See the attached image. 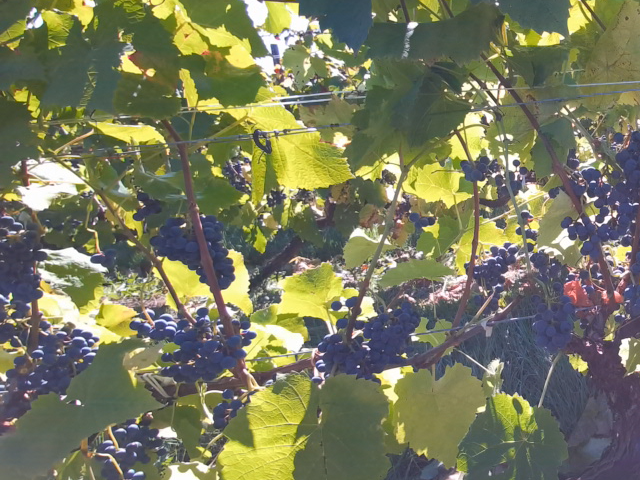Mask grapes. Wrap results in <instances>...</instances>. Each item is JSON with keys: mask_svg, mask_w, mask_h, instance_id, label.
Here are the masks:
<instances>
[{"mask_svg": "<svg viewBox=\"0 0 640 480\" xmlns=\"http://www.w3.org/2000/svg\"><path fill=\"white\" fill-rule=\"evenodd\" d=\"M629 143V147L615 156V160L624 171L623 183H617L612 187L609 183L598 186L602 172L593 167L579 170V174L589 184L587 189L584 184L577 185L573 178L569 179V184L576 196H581L586 191L589 198H598L593 201L595 208H601L600 214L595 216L597 224H602L604 216L610 214V209L603 207L604 205L609 204L611 209H617V214L621 216L616 230L609 229L607 224L596 227L591 223L589 216L582 218V223L572 224L571 216H566L561 222V227L566 229L571 240H590L581 244L580 253L588 255L592 261L600 260V242L618 240L620 235H625L620 239V244L623 247H629L633 242V236L626 233L637 231V226L632 220L639 217L640 205H631L629 202H640V132L632 131Z\"/></svg>", "mask_w": 640, "mask_h": 480, "instance_id": "obj_1", "label": "grapes"}, {"mask_svg": "<svg viewBox=\"0 0 640 480\" xmlns=\"http://www.w3.org/2000/svg\"><path fill=\"white\" fill-rule=\"evenodd\" d=\"M393 315L398 320L385 329L384 324L389 321L387 314H381L366 323L357 320L354 328L363 330V336L353 338V350L340 344L343 342L342 336L326 333L317 343L319 352L325 354L323 358L315 360V368L319 373H324L325 379L331 376L335 368L337 374L356 375L358 378L364 376L366 380L381 384L382 380L374 373L381 374L387 363L401 362V358L396 355L401 349L400 343L415 332L421 322V318L411 311V305L407 302H402ZM324 378L312 376L311 381L320 385Z\"/></svg>", "mask_w": 640, "mask_h": 480, "instance_id": "obj_2", "label": "grapes"}, {"mask_svg": "<svg viewBox=\"0 0 640 480\" xmlns=\"http://www.w3.org/2000/svg\"><path fill=\"white\" fill-rule=\"evenodd\" d=\"M51 323L41 320L38 323L37 349H33L31 356L34 359L43 357L27 373L18 372L16 368L6 371L8 378L17 381V390L8 398L5 408L7 417H18L32 409V402L39 395H47L58 392L65 395L70 388V373L73 364L78 372H84L95 359V353L91 351L93 345L101 341L99 335H93L89 330L82 328L62 327L55 335L49 330Z\"/></svg>", "mask_w": 640, "mask_h": 480, "instance_id": "obj_3", "label": "grapes"}, {"mask_svg": "<svg viewBox=\"0 0 640 480\" xmlns=\"http://www.w3.org/2000/svg\"><path fill=\"white\" fill-rule=\"evenodd\" d=\"M233 325L243 329L244 337L232 335L227 339L230 354L222 348L223 344L220 341H201L199 343L197 329H187L189 327L187 320L176 321L169 314H162L153 322V327L146 321H132L130 329L153 340L166 339L168 342H174L177 346H181V349H176L173 354L163 353L161 360L163 362L196 360L195 365L183 364L181 368L178 365L165 366L160 370V375L174 378L176 382L185 380L188 383H194L200 378L212 382L224 369H233L239 359H244L247 356V350L241 347L250 346L251 339H256L257 333L247 331L250 327L249 321L233 320Z\"/></svg>", "mask_w": 640, "mask_h": 480, "instance_id": "obj_4", "label": "grapes"}, {"mask_svg": "<svg viewBox=\"0 0 640 480\" xmlns=\"http://www.w3.org/2000/svg\"><path fill=\"white\" fill-rule=\"evenodd\" d=\"M24 229L8 215L0 216V322L8 318L5 305L16 307L12 318H23L31 310L34 300L43 297L40 287V274L35 272L33 262L45 261L48 254L41 242H35L37 226L28 224L21 243L9 244L6 239L12 231Z\"/></svg>", "mask_w": 640, "mask_h": 480, "instance_id": "obj_5", "label": "grapes"}, {"mask_svg": "<svg viewBox=\"0 0 640 480\" xmlns=\"http://www.w3.org/2000/svg\"><path fill=\"white\" fill-rule=\"evenodd\" d=\"M151 425L150 419H145L138 424L135 419H129L125 423L114 425L111 432L116 437L121 450L117 451L116 445L111 440H106L97 447L99 454H111L115 458L126 480H144L146 478L144 471L127 467L135 466L137 461L148 464L150 457L144 449L153 450L162 445V441L157 438L159 431L149 429Z\"/></svg>", "mask_w": 640, "mask_h": 480, "instance_id": "obj_6", "label": "grapes"}, {"mask_svg": "<svg viewBox=\"0 0 640 480\" xmlns=\"http://www.w3.org/2000/svg\"><path fill=\"white\" fill-rule=\"evenodd\" d=\"M532 302L538 309L536 321L533 324V330L540 335L538 344L541 347H547L552 353H556L559 349H564L566 344L572 342L573 323L570 316L574 310L572 300L566 294L559 297L560 306L548 309L543 304V297L535 294Z\"/></svg>", "mask_w": 640, "mask_h": 480, "instance_id": "obj_7", "label": "grapes"}, {"mask_svg": "<svg viewBox=\"0 0 640 480\" xmlns=\"http://www.w3.org/2000/svg\"><path fill=\"white\" fill-rule=\"evenodd\" d=\"M184 223L182 218L169 217L166 225L160 228V236L150 239L152 246H158V255L168 257L170 261H179L188 264L190 271H196V275H201L200 283H207L204 270L200 266L199 243L195 236L182 230L180 226Z\"/></svg>", "mask_w": 640, "mask_h": 480, "instance_id": "obj_8", "label": "grapes"}, {"mask_svg": "<svg viewBox=\"0 0 640 480\" xmlns=\"http://www.w3.org/2000/svg\"><path fill=\"white\" fill-rule=\"evenodd\" d=\"M489 253L494 257H486L482 264L473 268V279L478 284H484L487 291H493L492 300L484 307L483 313L489 315L498 309L500 292L504 290L505 276L501 273L508 271V265L516 262L517 247L506 242L504 248L497 245L489 247Z\"/></svg>", "mask_w": 640, "mask_h": 480, "instance_id": "obj_9", "label": "grapes"}, {"mask_svg": "<svg viewBox=\"0 0 640 480\" xmlns=\"http://www.w3.org/2000/svg\"><path fill=\"white\" fill-rule=\"evenodd\" d=\"M204 237L207 242V249L213 259V267L216 271V278L222 290H227L231 285V282L235 280V266L233 265V259L226 257L228 255V249L222 247L218 242L222 240L223 224L220 221H216L214 215H200Z\"/></svg>", "mask_w": 640, "mask_h": 480, "instance_id": "obj_10", "label": "grapes"}, {"mask_svg": "<svg viewBox=\"0 0 640 480\" xmlns=\"http://www.w3.org/2000/svg\"><path fill=\"white\" fill-rule=\"evenodd\" d=\"M9 338V345L11 347H24L29 342L30 331L23 325L0 323V344H4Z\"/></svg>", "mask_w": 640, "mask_h": 480, "instance_id": "obj_11", "label": "grapes"}, {"mask_svg": "<svg viewBox=\"0 0 640 480\" xmlns=\"http://www.w3.org/2000/svg\"><path fill=\"white\" fill-rule=\"evenodd\" d=\"M490 164L491 158L483 155L479 160H463L460 168L465 172V180L474 184L484 179Z\"/></svg>", "mask_w": 640, "mask_h": 480, "instance_id": "obj_12", "label": "grapes"}, {"mask_svg": "<svg viewBox=\"0 0 640 480\" xmlns=\"http://www.w3.org/2000/svg\"><path fill=\"white\" fill-rule=\"evenodd\" d=\"M533 267L539 270L544 277L556 278L563 264L556 259L550 260L549 256L541 250H536L530 256Z\"/></svg>", "mask_w": 640, "mask_h": 480, "instance_id": "obj_13", "label": "grapes"}, {"mask_svg": "<svg viewBox=\"0 0 640 480\" xmlns=\"http://www.w3.org/2000/svg\"><path fill=\"white\" fill-rule=\"evenodd\" d=\"M249 403H250L249 399H244L243 401L241 399H234L231 401V403H217L213 407L212 419H213L214 427L216 429L225 428L227 426V423L225 422V419H224L226 417V411L231 410L230 416L236 417L237 416L236 410L241 409L242 407H245L246 404H249Z\"/></svg>", "mask_w": 640, "mask_h": 480, "instance_id": "obj_14", "label": "grapes"}, {"mask_svg": "<svg viewBox=\"0 0 640 480\" xmlns=\"http://www.w3.org/2000/svg\"><path fill=\"white\" fill-rule=\"evenodd\" d=\"M622 295L628 301L625 309L633 318L640 316V286L636 284H628Z\"/></svg>", "mask_w": 640, "mask_h": 480, "instance_id": "obj_15", "label": "grapes"}, {"mask_svg": "<svg viewBox=\"0 0 640 480\" xmlns=\"http://www.w3.org/2000/svg\"><path fill=\"white\" fill-rule=\"evenodd\" d=\"M137 200L142 202L145 207L138 209L136 213L133 215L134 221H141L145 217L150 216L152 214H160L162 212V206L159 200H150L149 195L146 193H138Z\"/></svg>", "mask_w": 640, "mask_h": 480, "instance_id": "obj_16", "label": "grapes"}, {"mask_svg": "<svg viewBox=\"0 0 640 480\" xmlns=\"http://www.w3.org/2000/svg\"><path fill=\"white\" fill-rule=\"evenodd\" d=\"M600 270L598 263H594L590 271L587 268H582L578 273V278L581 280V288L587 293L591 294L596 291V288L593 285H587L588 280L591 276L594 280H600L603 277V273Z\"/></svg>", "mask_w": 640, "mask_h": 480, "instance_id": "obj_17", "label": "grapes"}, {"mask_svg": "<svg viewBox=\"0 0 640 480\" xmlns=\"http://www.w3.org/2000/svg\"><path fill=\"white\" fill-rule=\"evenodd\" d=\"M115 253V247H105L102 253L95 254L90 258V263L93 265H101L105 268H112L115 262V258L113 257Z\"/></svg>", "mask_w": 640, "mask_h": 480, "instance_id": "obj_18", "label": "grapes"}, {"mask_svg": "<svg viewBox=\"0 0 640 480\" xmlns=\"http://www.w3.org/2000/svg\"><path fill=\"white\" fill-rule=\"evenodd\" d=\"M208 312V308H199L197 310V323L195 324V327L199 328L202 333H210L212 331V328L206 324L209 322V318L207 317Z\"/></svg>", "mask_w": 640, "mask_h": 480, "instance_id": "obj_19", "label": "grapes"}, {"mask_svg": "<svg viewBox=\"0 0 640 480\" xmlns=\"http://www.w3.org/2000/svg\"><path fill=\"white\" fill-rule=\"evenodd\" d=\"M410 221L412 223H415L418 227H421V228H427L428 226H433L437 223V219L434 216H431V217L423 216L421 218V216L418 213H413L410 216Z\"/></svg>", "mask_w": 640, "mask_h": 480, "instance_id": "obj_20", "label": "grapes"}, {"mask_svg": "<svg viewBox=\"0 0 640 480\" xmlns=\"http://www.w3.org/2000/svg\"><path fill=\"white\" fill-rule=\"evenodd\" d=\"M508 174L510 175V181L513 189L512 195L517 196L523 187V182L521 180H516V174L513 171H510Z\"/></svg>", "mask_w": 640, "mask_h": 480, "instance_id": "obj_21", "label": "grapes"}, {"mask_svg": "<svg viewBox=\"0 0 640 480\" xmlns=\"http://www.w3.org/2000/svg\"><path fill=\"white\" fill-rule=\"evenodd\" d=\"M503 177L500 174H497L494 178L495 185L499 188L500 193L505 196L507 199H510V196L507 192L506 185H503Z\"/></svg>", "mask_w": 640, "mask_h": 480, "instance_id": "obj_22", "label": "grapes"}]
</instances>
